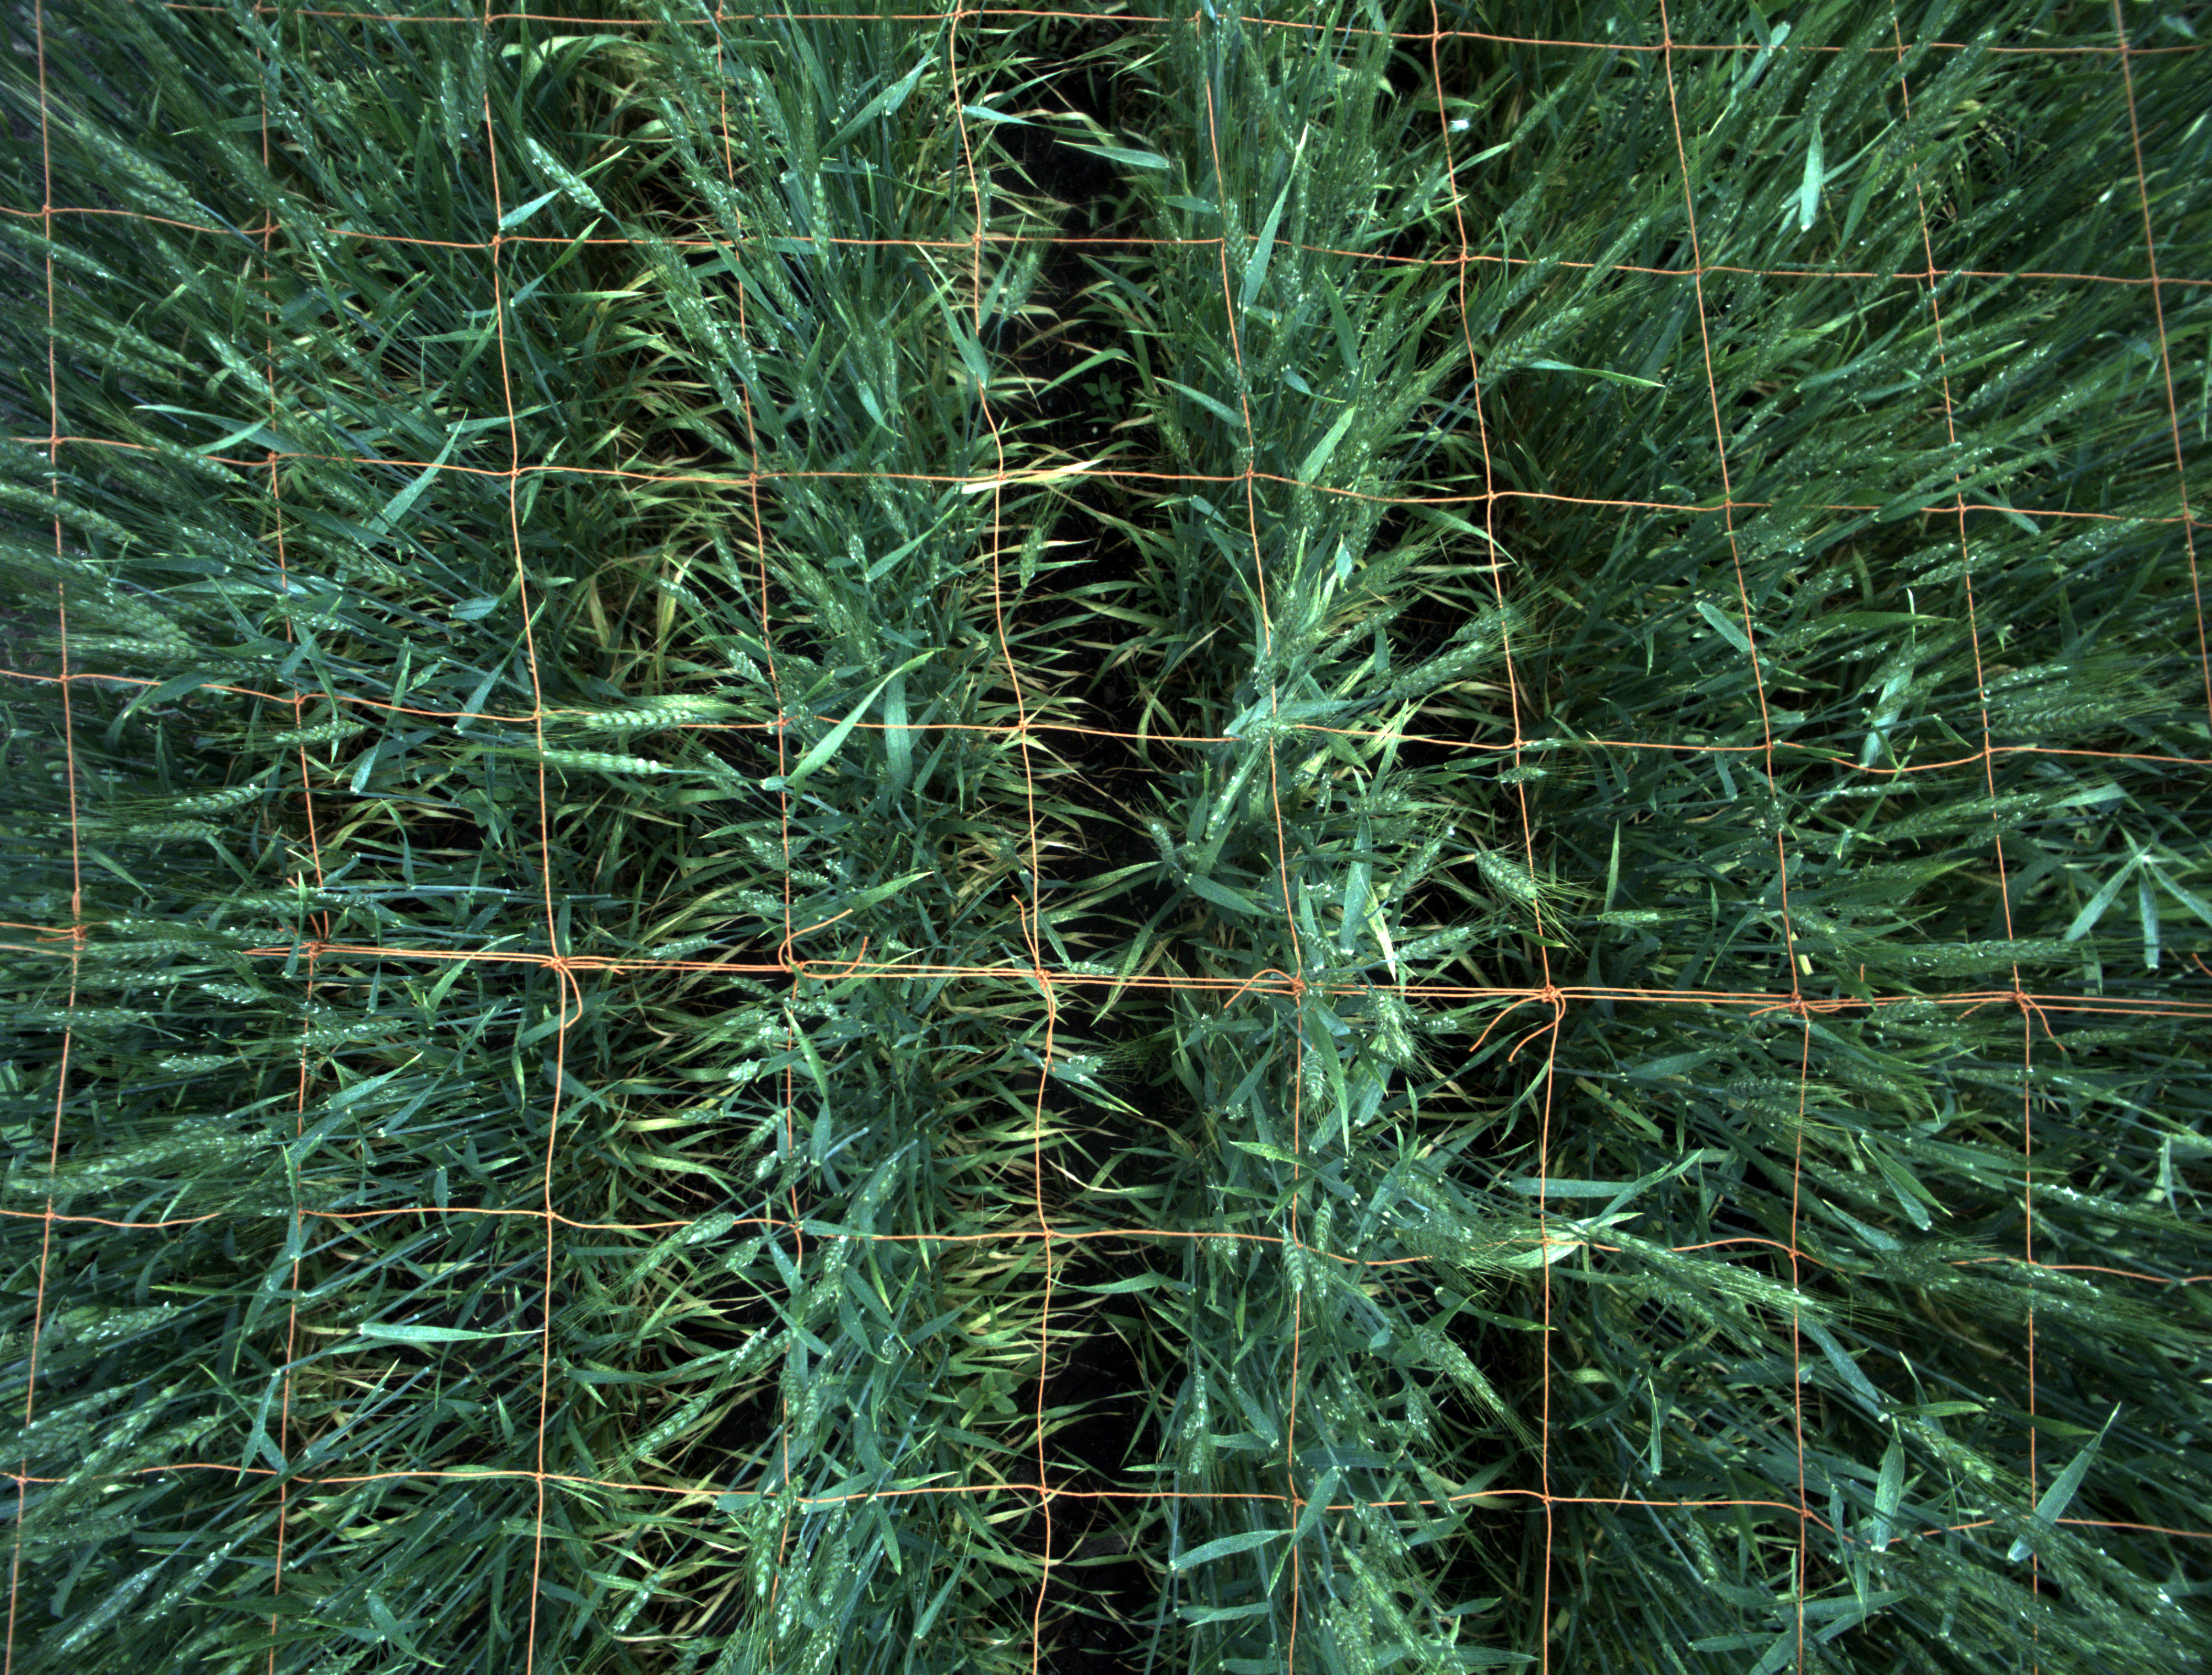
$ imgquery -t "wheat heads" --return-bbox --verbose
[1200,1012,1216,1035]
[1877,1021,1950,1044]
[763,261,801,324]
[1155,206,1178,244]
[297,1001,346,1026]
[168,1112,232,1139]
[130,822,227,843]
[1064,1051,1107,1072]
[289,1029,359,1051]
[851,340,882,392]
[723,1008,771,1028]
[282,600,348,635]
[1333,80,1356,131]
[100,587,181,634]
[201,328,277,406]
[1926,959,1997,980]
[1422,1207,1471,1242]
[1581,1221,1740,1295]
[788,655,819,676]
[1740,47,1791,112]
[247,1176,321,1202]
[1910,446,1989,495]
[1895,634,1957,677]
[1336,189,1378,243]
[1872,1548,1950,1590]
[365,136,401,179]
[1384,1225,1462,1261]
[1441,1641,1467,1675]
[0,480,129,547]
[2120,734,2158,755]
[176,596,252,615]
[0,542,106,591]
[1397,1368,1442,1420]
[728,646,769,689]
[614,1573,662,1632]
[669,286,728,356]
[229,4,274,54]
[1357,374,1371,412]
[1385,834,1445,903]
[1244,73,1275,118]
[1396,1172,1448,1216]
[748,1497,773,1603]
[1491,188,1527,230]
[1770,440,1816,476]
[702,771,748,806]
[1299,928,1335,954]
[704,357,744,416]
[1790,566,1836,615]
[1974,1259,2101,1296]
[715,176,759,211]
[702,899,747,914]
[1502,249,1562,310]
[1893,1262,1965,1296]
[525,134,606,213]
[269,720,368,748]
[285,214,326,245]
[1743,181,1771,227]
[1721,121,1760,190]
[151,62,191,103]
[883,335,900,419]
[352,219,403,259]
[1378,821,1424,843]
[736,337,760,384]
[1340,1549,1429,1666]
[680,1106,723,1123]
[1252,656,1273,697]
[1727,1075,1794,1098]
[1890,161,1932,203]
[1320,609,1402,664]
[1861,643,1928,697]
[1910,268,1963,315]
[1342,787,1403,814]
[1391,638,1488,702]
[826,1500,846,1542]
[245,1279,341,1336]
[1732,354,1771,390]
[657,580,704,608]
[1767,800,1784,838]
[1412,1320,1477,1383]
[1219,0,1244,51]
[224,925,296,952]
[1838,349,1911,392]
[193,945,251,971]
[1350,501,1368,558]
[1396,160,1443,228]
[1926,38,1986,95]
[836,54,854,114]
[774,833,817,859]
[800,705,827,738]
[684,1211,736,1244]
[40,328,189,386]
[2158,671,2196,701]
[1823,1054,1895,1091]
[1968,1279,2093,1326]
[90,937,186,970]
[1942,1635,1999,1674]
[2010,377,2102,439]
[1358,69,1380,127]
[1980,680,2068,710]
[847,534,868,566]
[1295,170,1313,219]
[1157,421,1192,458]
[232,897,310,917]
[2058,1529,2194,1634]
[1342,1383,1369,1420]
[1364,668,1394,699]
[725,1062,764,1086]
[943,696,965,716]
[753,318,783,353]
[344,1017,408,1038]
[2127,616,2178,644]
[1896,541,1959,568]
[1230,451,1257,479]
[1860,241,1908,306]
[330,338,388,390]
[1371,372,1400,412]
[294,203,326,227]
[685,417,741,458]
[1898,1632,1938,1674]
[646,935,718,959]
[1206,769,1247,838]
[657,100,695,170]
[754,1150,779,1188]
[756,1023,792,1042]
[1878,1239,1966,1263]
[1477,306,1584,379]
[1871,793,2041,840]
[826,603,844,636]
[224,278,281,313]
[711,534,744,587]
[731,1325,767,1372]
[1894,1414,1993,1480]
[303,477,377,521]
[194,506,258,554]
[824,1237,844,1275]
[1869,195,1921,243]
[82,635,195,662]
[1840,644,1889,663]
[2031,1180,2128,1221]
[1912,551,1999,588]
[20,1420,93,1465]
[1891,441,1961,488]
[1734,511,1770,553]
[169,784,263,818]
[849,221,866,270]
[1871,398,1923,437]
[1282,587,1300,643]
[1953,1142,2023,1162]
[1954,185,2019,240]
[1935,312,2023,354]
[21,1512,141,1549]
[1760,78,1790,120]
[308,1650,363,1673]
[743,1112,785,1151]
[696,174,742,236]
[242,49,276,83]
[728,975,775,999]
[880,15,898,85]
[91,314,196,372]
[1965,1491,2047,1553]
[1181,845,1192,868]
[2,435,51,468]
[1949,444,2054,494]
[1149,820,1178,868]
[211,140,280,208]
[1474,849,1539,902]
[272,100,314,145]
[871,637,882,658]
[1962,809,2022,851]
[1835,1274,1888,1310]
[742,833,783,871]
[1597,907,1661,929]
[776,683,800,701]
[294,58,341,107]
[1744,1099,1804,1130]
[1374,102,1407,152]
[1316,196,1342,234]
[71,118,187,201]
[1988,703,2114,735]
[115,1413,228,1478]
[1357,544,1427,595]
[105,917,204,943]
[860,313,881,366]
[795,383,820,424]
[1224,353,1251,398]
[1916,938,2062,959]
[912,311,928,364]
[881,767,901,793]
[0,219,111,279]
[88,967,183,994]
[262,1190,342,1211]
[225,1131,275,1163]
[703,750,752,789]
[1325,1600,1370,1670]
[573,705,724,727]
[437,63,463,158]
[1510,80,1568,143]
[73,600,153,637]
[1505,177,1545,246]
[144,0,191,34]
[1749,517,1811,564]
[1956,1067,2024,1084]
[1799,1161,1878,1204]
[1761,1387,1813,1433]
[1182,1363,1205,1444]
[885,937,913,952]
[1193,34,1211,120]
[777,1352,799,1420]
[1887,22,1940,85]
[880,494,913,542]
[1835,439,1892,471]
[1686,1519,1719,1580]
[1273,629,1330,661]
[859,640,880,676]
[1523,738,1562,755]
[2060,1026,2129,1050]
[125,466,197,509]
[1405,1386,1431,1437]
[675,62,713,150]
[1220,1220,1240,1258]
[1327,437,1371,481]
[766,1474,804,1535]
[726,1233,764,1269]
[1799,34,1869,138]
[1305,272,1325,313]
[138,1540,237,1624]
[1745,396,1780,428]
[1251,332,1285,377]
[194,659,278,684]
[734,889,784,915]
[1166,2,1188,82]
[1302,1050,1327,1103]
[875,1164,899,1200]
[1292,479,1320,540]
[1850,862,1914,881]
[771,1539,808,1638]
[778,1164,802,1191]
[796,1616,845,1675]
[47,1007,149,1031]
[802,1383,822,1436]
[1637,1561,1676,1598]
[1237,718,1297,745]
[1789,909,1837,936]
[996,832,1014,849]
[1752,312,1793,359]
[429,1102,467,1119]
[647,233,704,297]
[791,870,833,892]
[1827,903,1896,918]
[211,27,256,85]
[1224,206,1250,278]
[840,604,858,633]
[1956,343,2051,411]
[928,549,943,592]
[802,488,830,521]
[1982,663,2067,691]
[1277,1226,1305,1293]
[1358,310,1399,369]
[1793,777,1846,827]
[122,181,218,228]
[1845,780,1916,800]
[1916,824,1955,835]
[798,562,840,613]
[1067,960,1120,975]
[1188,1430,1207,1473]
[20,1385,135,1426]
[1898,1530,2094,1655]
[172,1625,233,1666]
[1018,525,1043,591]
[1300,882,1331,898]
[368,1088,401,1102]
[75,1135,227,1181]
[1453,608,1511,645]
[61,1556,166,1653]
[304,529,413,592]
[1913,1144,1956,1162]
[1412,1457,1454,1515]
[1307,1257,1331,1303]
[944,443,959,480]
[41,1379,187,1518]
[825,856,850,880]
[709,1627,745,1675]
[177,527,259,568]
[195,976,268,1009]
[2050,520,2148,567]
[783,998,822,1018]
[539,749,664,779]
[71,1305,184,1344]
[671,1633,705,1675]
[1310,1392,1342,1421]
[158,1053,240,1079]
[753,67,789,154]
[998,253,1041,323]
[1493,762,1549,789]
[1373,993,1401,1031]
[1777,445,1831,486]
[1395,1474,1431,1529]
[1368,460,1405,472]
[800,99,820,182]
[1351,1496,1401,1554]
[1371,375,1430,445]
[155,239,214,306]
[1273,259,1305,312]
[630,1394,713,1462]
[118,5,184,74]
[466,42,484,134]
[219,1653,254,1675]
[658,5,729,91]
[1912,350,1969,389]
[769,567,797,596]
[1726,276,1759,323]
[1796,1636,1822,1675]
[1222,1105,1248,1124]
[1422,1017,1459,1038]
[300,890,379,906]
[804,1281,845,1314]
[1764,627,1823,651]
[1585,214,1650,290]
[976,167,993,235]
[1867,996,1937,1024]
[1633,1273,1716,1329]
[1874,91,1949,186]
[760,184,790,235]
[1865,670,1943,727]
[1278,121,1311,169]
[820,1535,848,1611]
[1390,926,1471,965]
[1425,1263,1472,1295]
[20,1179,132,1198]
[2115,1611,2193,1664]
[622,1220,700,1285]
[136,428,252,489]
[752,1324,803,1368]
[1857,1551,1947,1615]
[1833,84,1872,130]
[284,350,321,371]
[1383,1021,1416,1065]
[811,169,831,272]
[1309,1197,1333,1256]
[878,1336,901,1363]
